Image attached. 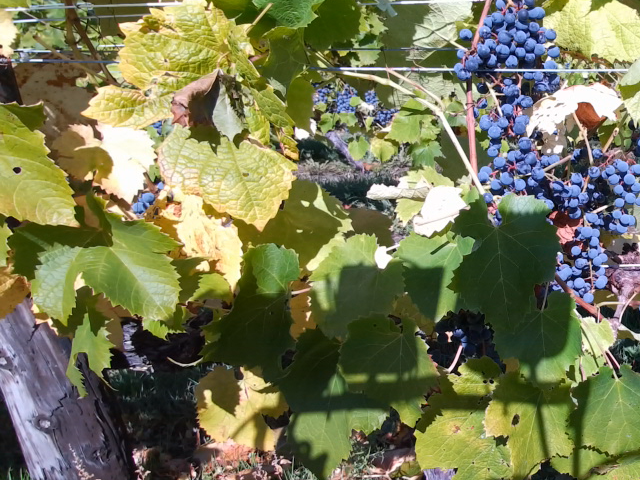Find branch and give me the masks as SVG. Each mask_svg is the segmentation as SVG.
Here are the masks:
<instances>
[{"label":"branch","mask_w":640,"mask_h":480,"mask_svg":"<svg viewBox=\"0 0 640 480\" xmlns=\"http://www.w3.org/2000/svg\"><path fill=\"white\" fill-rule=\"evenodd\" d=\"M346 76H350V77H359L364 79L365 81L368 82H374V83H383L387 86H391L394 87L396 89H398L401 92H404L405 94H407L409 97L413 98L414 100H416L418 103H421L423 105H425L426 107H428L431 111H433L437 117L442 121L444 127L446 128V132L448 134L449 137L452 138L453 142H454V146L456 148V150L458 151L462 162L464 163V165L466 166L468 173L470 174L472 180L474 181L476 187H477V191L480 194H484L485 190L482 188L481 182L479 181V179L477 178L476 174H478V163H477V159H476V152H477V141L475 139V133H474V123H475V111H474V107L472 104V98H473V90H472V82L470 80H467L465 82V93H466V97H465V107L468 113V121H467V136H468V141L470 144V150H469V160L466 157V154L464 153L462 147L460 146L459 140L457 135L452 132L451 126L448 123L447 119L445 116H443V114L440 112L439 109H437L434 105H432L430 102H428L427 100L421 98L419 95L413 93L412 91H410L407 87H404L394 81H390L387 80L385 78H381L380 75H377L374 72H370L369 75H366L364 73L361 72H350V71H346L345 72Z\"/></svg>","instance_id":"branch-1"},{"label":"branch","mask_w":640,"mask_h":480,"mask_svg":"<svg viewBox=\"0 0 640 480\" xmlns=\"http://www.w3.org/2000/svg\"><path fill=\"white\" fill-rule=\"evenodd\" d=\"M554 279L560 284L564 292L568 294L577 304L582 306L588 312L593 313L597 320L603 319V316L600 315V312L597 309L591 307L590 305H587L583 300H581L571 289H569L567 284L562 280V278L558 274L554 275Z\"/></svg>","instance_id":"branch-2"},{"label":"branch","mask_w":640,"mask_h":480,"mask_svg":"<svg viewBox=\"0 0 640 480\" xmlns=\"http://www.w3.org/2000/svg\"><path fill=\"white\" fill-rule=\"evenodd\" d=\"M490 7H491V0H486L485 6L483 7V11H482V17L479 20V25L476 28V31L474 33V37H472L470 51L466 52V55H471V54L475 53L476 43H478L479 38H480L479 31H480L481 27L483 26V21L485 20V17L488 14V11H489Z\"/></svg>","instance_id":"branch-3"}]
</instances>
